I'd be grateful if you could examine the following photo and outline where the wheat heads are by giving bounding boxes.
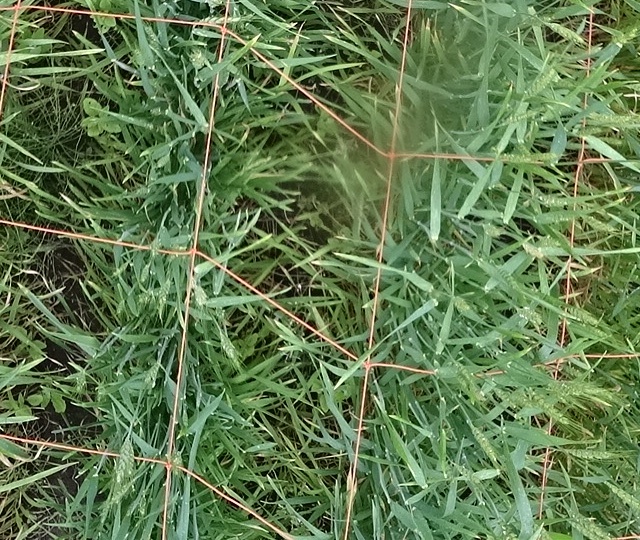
[155,279,174,303]
[589,112,636,127]
[560,363,583,379]
[492,382,513,404]
[139,264,151,279]
[560,519,601,540]
[527,392,565,422]
[568,445,610,461]
[545,378,595,397]
[449,290,468,311]
[545,21,586,40]
[497,150,533,166]
[580,216,611,234]
[513,306,538,323]
[563,304,595,324]
[111,479,134,497]
[448,462,482,483]
[603,478,635,507]
[523,238,541,259]
[451,358,469,379]
[471,427,496,459]
[481,218,500,239]
[521,67,553,101]
[216,330,233,355]
[540,194,569,206]
[142,26,157,42]
[194,13,242,24]
[115,438,135,476]
[145,361,160,379]
[496,266,514,289]
[572,509,605,535]
[133,48,142,69]
[168,455,182,476]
